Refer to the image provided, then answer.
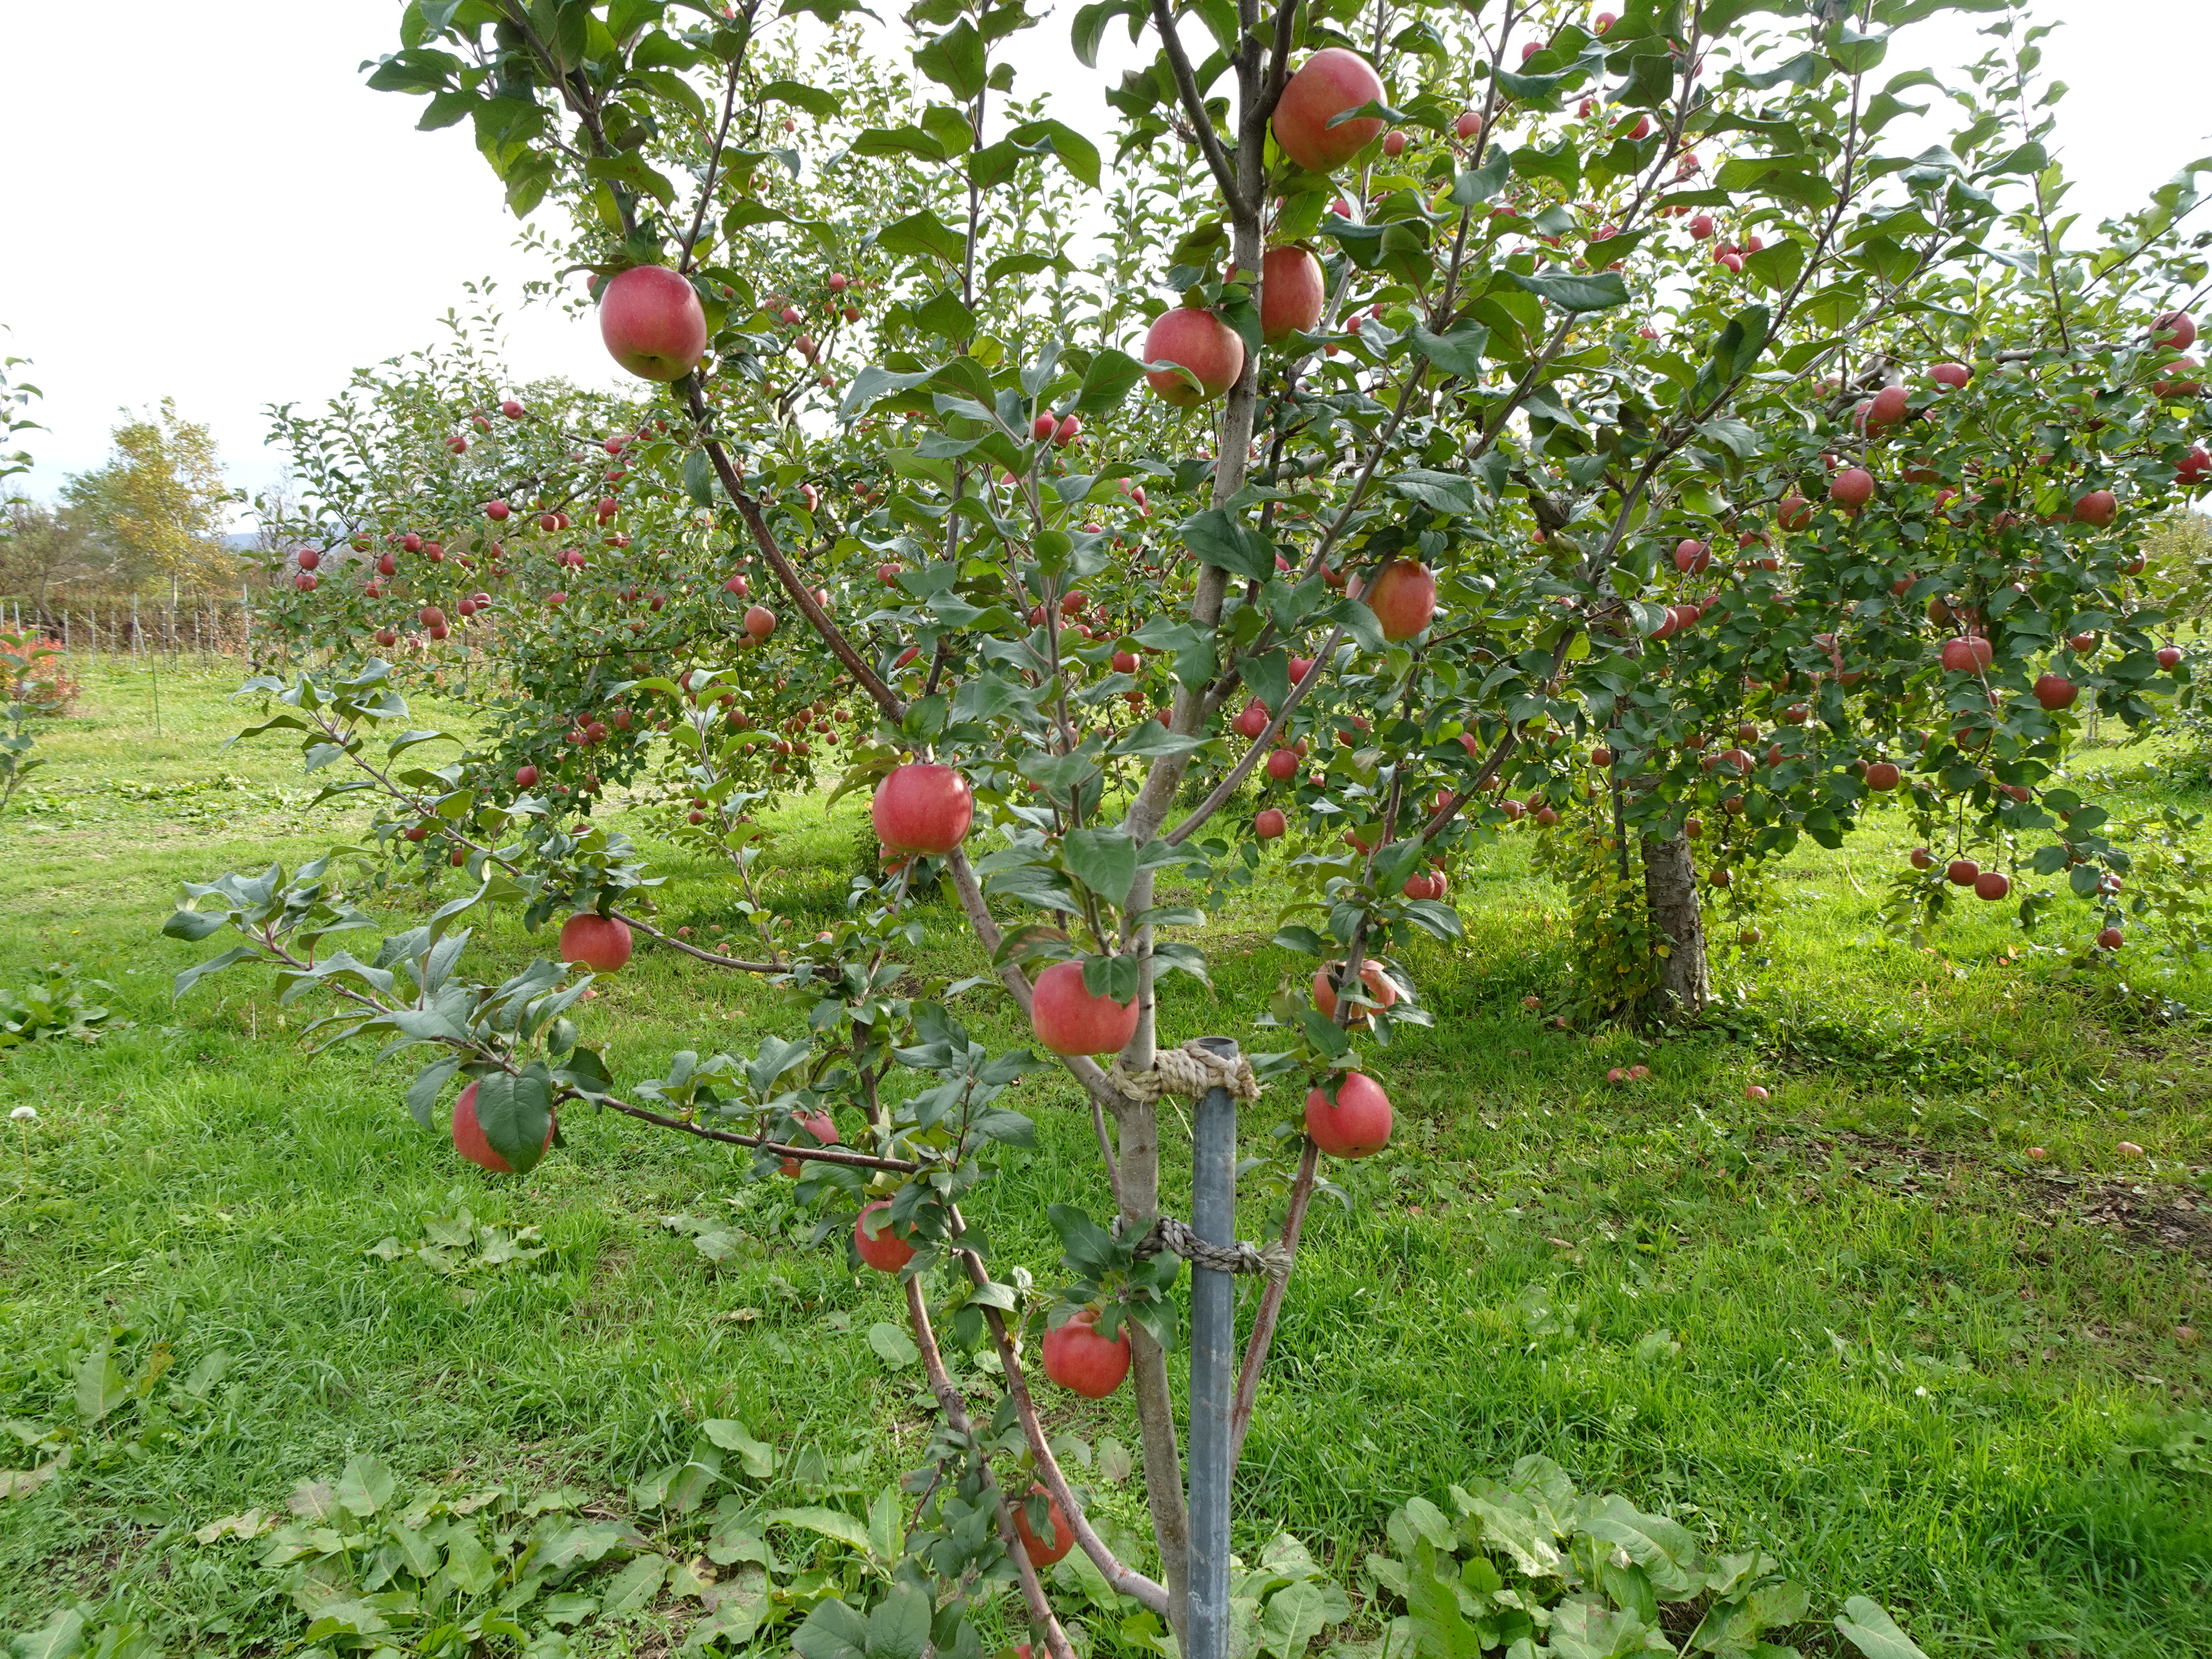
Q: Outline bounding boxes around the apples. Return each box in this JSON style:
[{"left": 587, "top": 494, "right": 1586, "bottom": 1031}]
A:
[
  {"left": 1345, "top": 560, "right": 1436, "bottom": 642},
  {"left": 600, "top": 265, "right": 707, "bottom": 381},
  {"left": 1030, "top": 960, "right": 1139, "bottom": 1055},
  {"left": 777, "top": 1110, "right": 839, "bottom": 1179},
  {"left": 1143, "top": 307, "right": 1244, "bottom": 406},
  {"left": 1012, "top": 1486, "right": 1075, "bottom": 1567},
  {"left": 879, "top": 842, "right": 924, "bottom": 877},
  {"left": 451, "top": 1079, "right": 554, "bottom": 1173},
  {"left": 1222, "top": 246, "right": 1324, "bottom": 343},
  {"left": 1271, "top": 47, "right": 1387, "bottom": 172},
  {"left": 872, "top": 765, "right": 973, "bottom": 854},
  {"left": 587, "top": 274, "right": 599, "bottom": 290},
  {"left": 1042, "top": 1310, "right": 1131, "bottom": 1398},
  {"left": 1312, "top": 958, "right": 1395, "bottom": 1027},
  {"left": 559, "top": 913, "right": 631, "bottom": 972},
  {"left": 855, "top": 1201, "right": 918, "bottom": 1273},
  {"left": 1304, "top": 1072, "right": 1393, "bottom": 1159}
]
